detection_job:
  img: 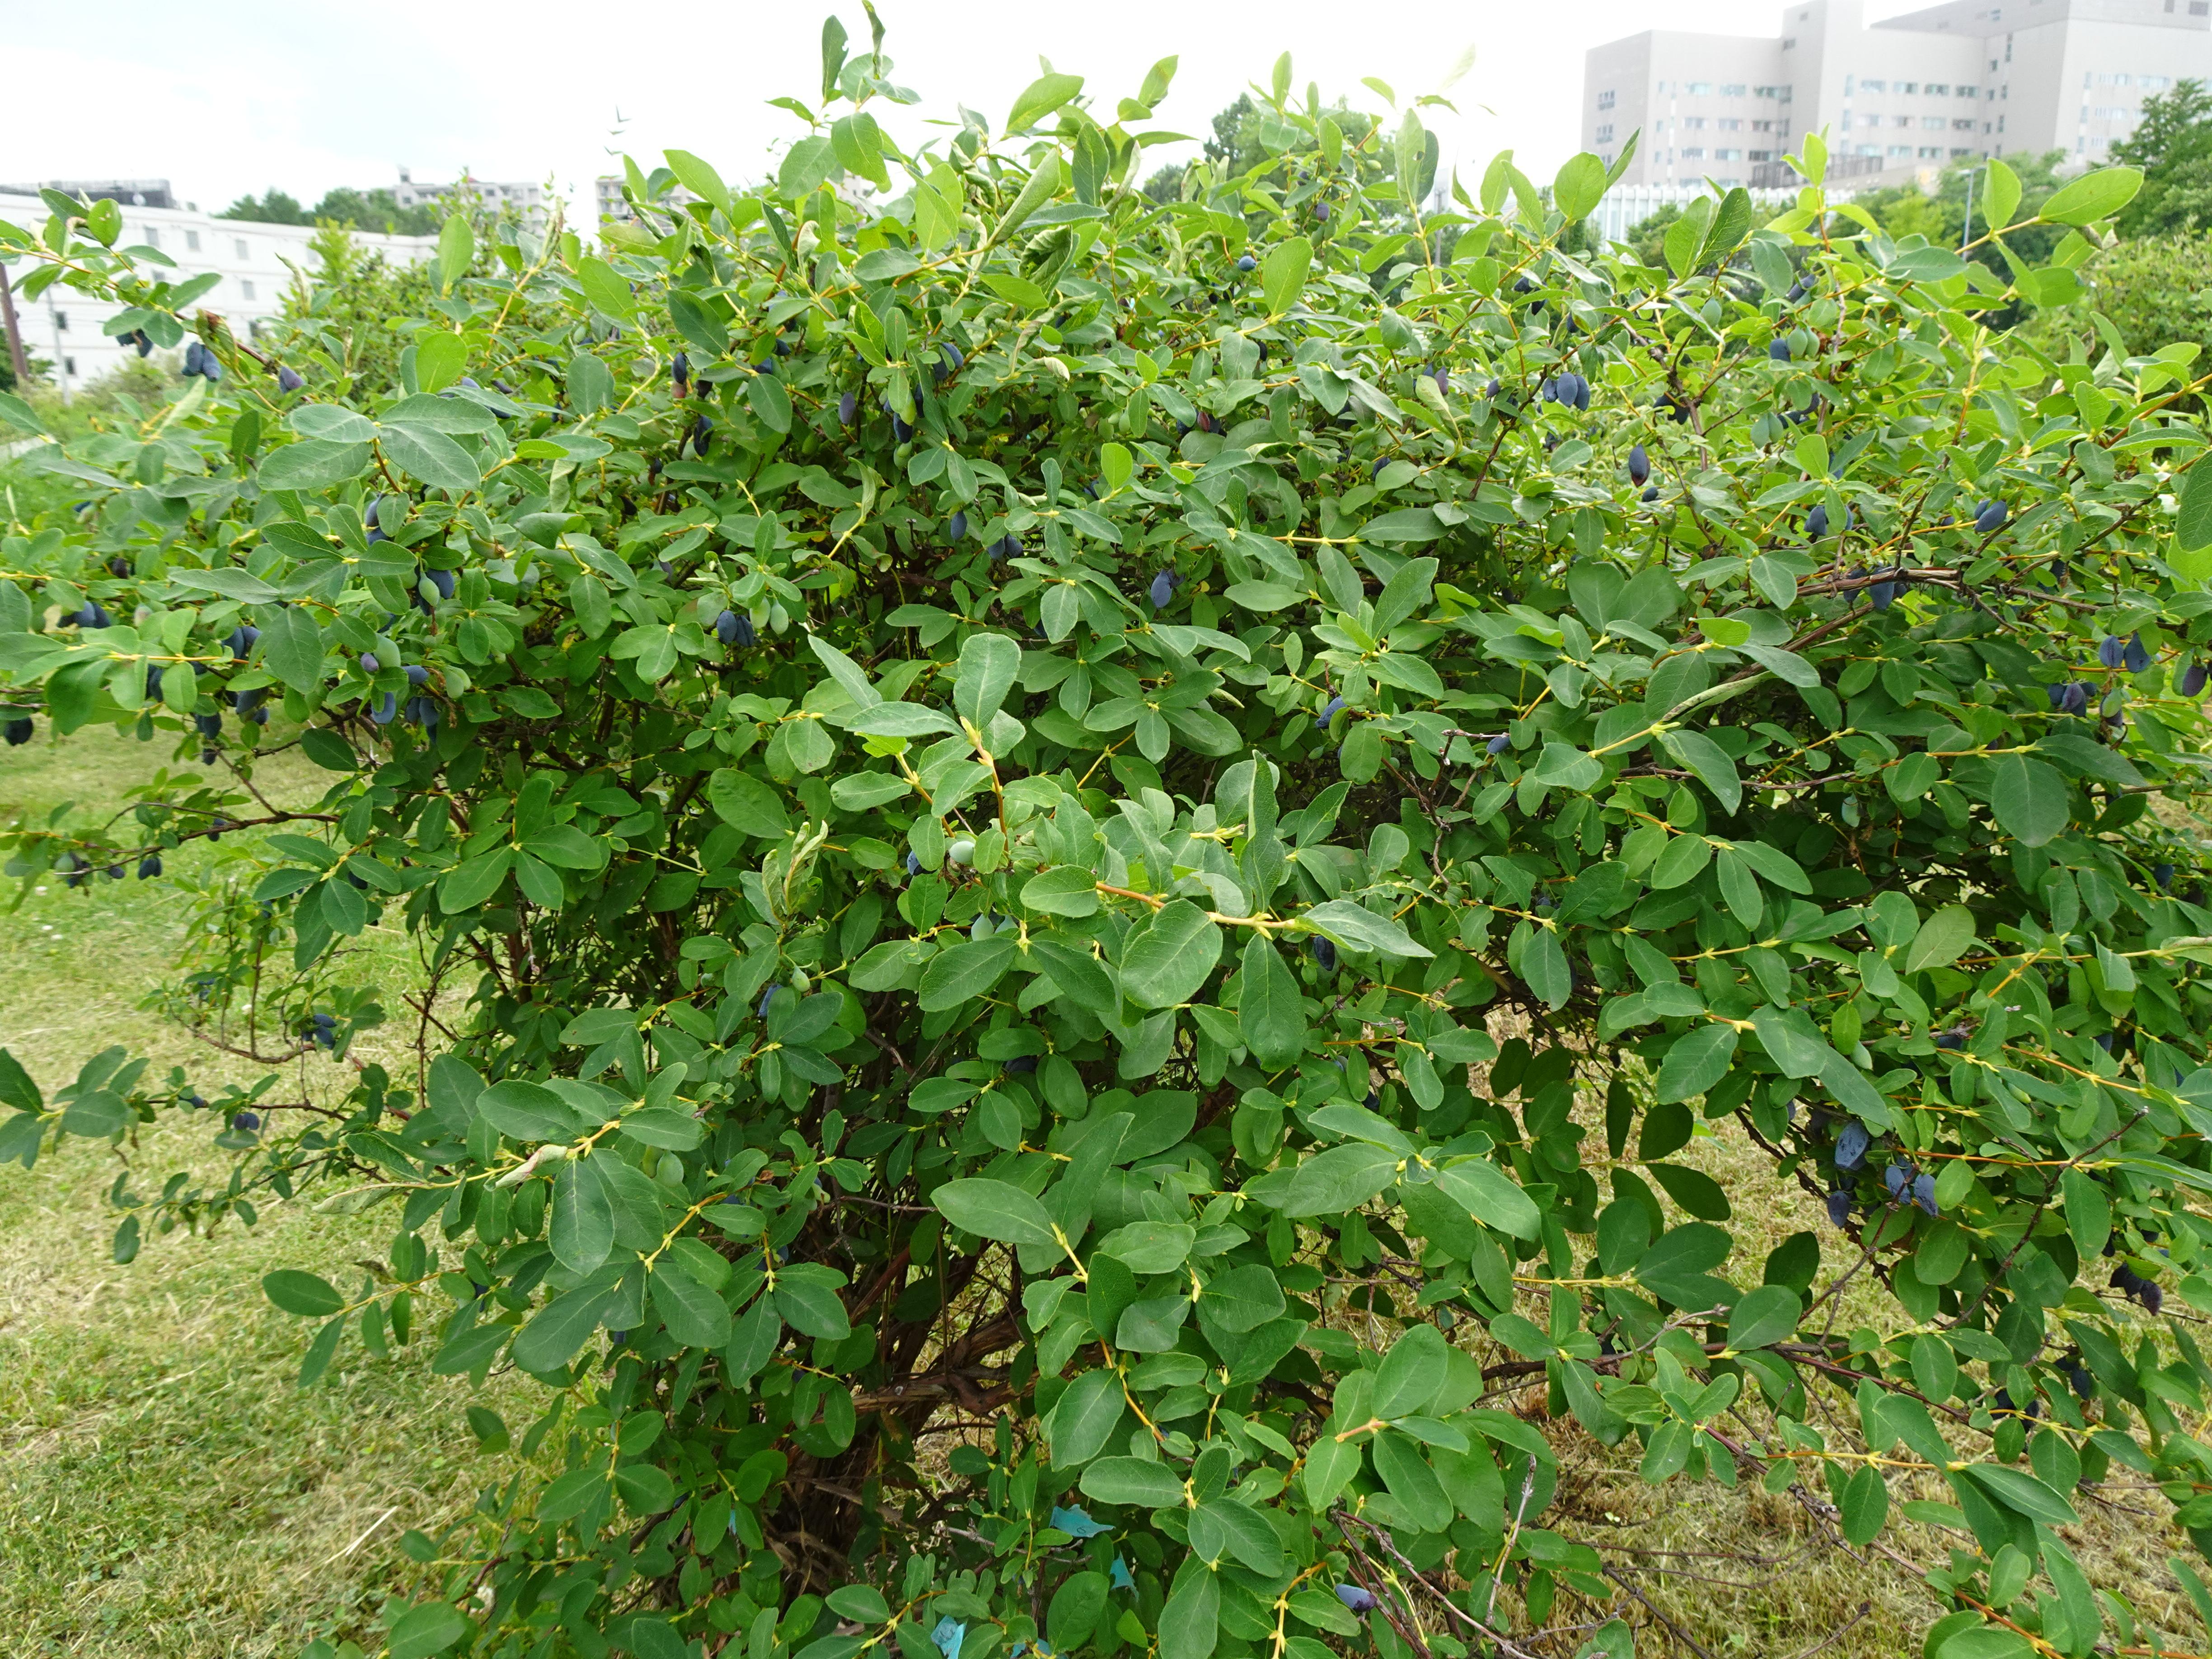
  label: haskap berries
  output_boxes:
[2011,1396,2039,1435]
[776,1245,788,1262]
[774,339,790,357]
[1654,393,1671,412]
[1159,330,1166,338]
[1767,410,1782,443]
[986,535,1006,559]
[180,343,206,377]
[153,857,162,877]
[2106,791,2119,808]
[1298,172,1308,185]
[1567,315,1579,333]
[1296,320,1307,336]
[1085,488,1095,500]
[68,860,92,888]
[1502,587,1513,603]
[200,990,212,999]
[195,713,220,749]
[696,376,713,397]
[2048,682,2067,705]
[1633,456,1651,487]
[715,611,737,645]
[1828,454,1841,479]
[1509,397,1519,420]
[1849,1154,1865,1170]
[2132,1215,2158,1242]
[1218,429,1228,438]
[189,661,209,674]
[906,851,923,877]
[76,601,95,628]
[1345,419,1356,432]
[2127,862,2145,883]
[115,307,136,346]
[312,1014,339,1026]
[1230,1044,1248,1066]
[215,688,238,708]
[883,400,892,413]
[70,852,81,868]
[915,382,926,419]
[289,893,296,899]
[756,982,783,1017]
[2125,1273,2141,1297]
[1056,314,1072,330]
[659,559,673,582]
[551,403,562,423]
[1108,409,1123,425]
[279,379,290,393]
[4,719,18,746]
[1776,409,1800,427]
[420,695,439,726]
[113,557,128,579]
[367,525,394,546]
[1317,693,1350,726]
[1573,375,1593,412]
[312,1027,334,1050]
[1542,374,1560,404]
[417,573,441,606]
[368,919,378,926]
[2061,682,2083,709]
[1238,256,1255,271]
[145,664,156,700]
[1208,411,1221,434]
[1366,159,1381,171]
[615,1330,623,1343]
[1387,757,1400,773]
[949,840,975,864]
[752,1248,768,1271]
[1122,298,1129,314]
[802,433,817,455]
[2099,693,2123,726]
[1842,566,1866,602]
[894,411,916,444]
[1769,336,1792,363]
[1478,774,1483,784]
[2110,1261,2134,1289]
[1833,1120,1867,1168]
[1809,505,1826,535]
[563,393,570,404]
[657,1148,684,1188]
[619,496,637,516]
[628,281,638,299]
[2142,1278,2161,1315]
[897,440,912,457]
[2076,659,2096,697]
[401,858,413,868]
[1970,500,1990,526]
[208,832,220,842]
[671,380,687,398]
[365,494,385,526]
[1667,402,1677,421]
[1338,1055,1349,1066]
[1842,794,1860,826]
[1800,1007,1815,1020]
[2124,628,2154,674]
[1642,487,1658,502]
[1939,1033,1962,1051]
[1553,902,1561,910]
[694,428,709,457]
[1485,377,1502,400]
[182,1092,208,1109]
[893,447,911,468]
[770,597,789,636]
[1362,1091,1381,1113]
[813,1176,822,1189]
[840,392,856,425]
[467,1266,490,1314]
[213,819,227,825]
[695,414,713,436]
[1801,327,1821,359]
[1531,282,1546,316]
[641,1145,661,1176]
[1844,505,1853,532]
[425,564,456,598]
[2174,1069,2184,1087]
[1370,458,1390,481]
[1316,202,1330,223]
[1988,1387,2014,1420]
[938,341,963,369]
[1675,402,1689,424]
[152,666,173,706]
[1312,935,1335,972]
[724,1193,740,1205]
[207,464,220,472]
[348,871,368,889]
[1499,393,1513,415]
[574,322,589,343]
[91,600,111,629]
[749,595,769,631]
[1434,367,1450,396]
[138,859,156,880]
[1515,275,1537,295]
[1804,517,1812,532]
[304,1030,312,1040]
[377,611,395,633]
[74,500,91,513]
[491,404,513,420]
[2071,699,2087,718]
[1034,617,1047,639]
[425,487,442,503]
[1255,1055,1261,1065]
[418,594,435,616]
[1941,515,1955,527]
[1537,896,1551,908]
[1209,281,1234,304]
[1906,551,1923,565]
[769,290,787,313]
[136,330,151,359]
[1338,448,1351,464]
[1702,296,1721,330]
[55,855,73,879]
[667,495,680,512]
[2102,687,2122,717]
[535,356,560,369]
[971,913,994,941]
[372,633,402,670]
[725,1158,754,1187]
[996,913,1017,936]
[1985,734,2004,750]
[2008,604,2018,613]
[2102,1242,2114,1257]
[1256,341,1268,361]
[1790,273,1815,301]
[2088,1169,2111,1186]
[1851,1041,1873,1071]
[950,509,967,540]
[2008,1082,2029,1104]
[783,316,797,332]
[1341,403,1350,422]
[1253,303,1257,312]
[2053,1354,2080,1372]
[649,457,663,474]
[1569,553,1580,568]
[242,626,263,643]
[399,663,430,683]
[1883,1165,1911,1205]
[1801,385,1818,413]
[1752,411,1770,448]
[252,708,269,728]
[755,357,773,374]
[610,402,621,414]
[2099,634,2124,667]
[2093,1031,2113,1052]
[2182,662,2209,697]
[270,898,277,903]
[1870,564,1895,611]
[1788,327,1805,357]
[233,1113,245,1130]
[1914,1173,1939,1215]
[1176,407,1199,434]
[1336,1582,1377,1614]
[1338,744,1344,759]
[1786,1100,1796,1122]
[1006,531,1022,558]
[202,347,223,383]
[2070,1367,2096,1398]
[2153,862,2176,893]
[439,388,455,398]
[934,353,949,379]
[404,696,421,726]
[107,864,125,881]
[201,746,218,766]
[502,364,516,386]
[1828,1190,1851,1230]
[369,691,397,726]
[262,901,274,917]
[492,380,512,394]
[199,979,215,985]
[1088,480,1100,498]
[2038,559,2065,591]
[57,611,77,628]
[1896,581,1908,599]
[672,352,690,384]
[221,625,244,659]
[461,375,490,409]
[2159,1248,2171,1260]
[281,365,306,389]
[809,267,817,287]
[734,614,754,650]
[296,887,304,894]
[792,966,810,992]
[1196,411,1210,432]
[1972,500,2008,532]
[857,353,864,362]
[1119,401,1131,433]
[1413,362,1433,394]
[1517,523,1525,529]
[1150,568,1172,609]
[1628,442,1648,480]
[579,337,593,347]
[1558,371,1578,408]
[236,688,265,716]
[1487,735,1511,754]
[1511,599,1522,605]
[1898,1158,1912,1175]
[1168,568,1184,585]
[1333,1061,1344,1073]
[2184,885,2207,909]
[274,600,285,608]
[2172,651,2194,696]
[17,717,34,744]
[361,650,381,676]
[1004,1053,1037,1074]
[245,1111,259,1131]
